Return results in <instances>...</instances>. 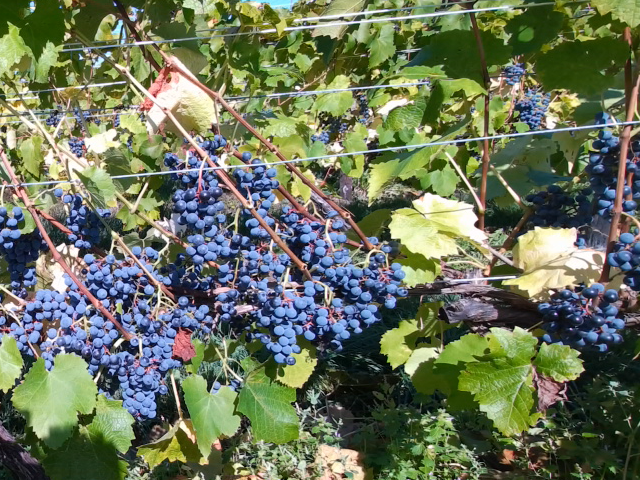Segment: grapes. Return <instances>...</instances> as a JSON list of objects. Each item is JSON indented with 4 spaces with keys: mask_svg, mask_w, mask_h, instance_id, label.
<instances>
[{
    "mask_svg": "<svg viewBox=\"0 0 640 480\" xmlns=\"http://www.w3.org/2000/svg\"><path fill=\"white\" fill-rule=\"evenodd\" d=\"M170 175L173 181L181 179L183 183H195L190 189L183 191L177 189L172 196L175 203V209L180 212L177 217L179 225L195 224L198 230H202V234L195 233L187 237L189 244L195 247H188L186 254L192 257L194 263V272H189L182 261L186 260L185 253H178L177 259L173 263L162 266L160 272L168 273V276L159 275V270L147 263L148 259L157 260L159 253L157 249L152 247L133 246L132 252L139 258V261L147 270V272L160 283L173 287H185L188 290L207 291L211 288V284L218 282L226 285L228 281L234 280V264L232 262H223L218 268L216 275H208L207 278L199 273L204 269L206 262H216L218 257L222 258L238 256L243 248L242 254L247 259L244 265L242 260L238 261L239 276L235 279L237 289H230L228 292L220 293L213 297L214 301L220 302L218 311L220 320L228 323L233 319V315L237 314L234 307L237 299L242 297V292L248 289H258L259 293H255L251 297V304L257 310L249 312V320L256 322L259 328L268 327L270 334L277 337V342L271 341L269 334H263L259 329H254L252 333L245 335V341L252 343L254 339H260V343L265 345V349L273 355L275 363H285L286 365H294L296 358L291 354H299L301 347L297 344V336L303 335L305 340L314 342L317 335H325L329 330L333 333L332 339L329 341L330 348L336 353H342L344 346L341 340L350 338V330L355 334H362L365 328H369L374 323L382 320V315L378 312L379 308L371 304L376 298L378 304H384L386 309H394L397 306V298L407 297L408 290L399 287L401 280L406 277L403 265L400 262L390 265L391 271L384 270L382 275L389 278V284L380 281L381 275L379 264L386 263V256L382 253L395 254L399 248L397 241L391 240L388 245H382L380 251L376 255L370 257L368 267L356 268L354 262L350 260L349 249L341 247L333 252V256H327L330 249V243L318 238V233L324 230V226L319 222H308L304 220L299 222L303 215L301 213H289L290 208L285 206L281 209L280 220L291 230H281L279 233L284 234L281 239H285L293 244L309 243L302 247L301 259L304 262H310L315 266V272L311 277L315 281H321L327 284L330 290H335L341 286V293L344 295L348 303L347 305L341 298H333L330 305L335 311L343 312L338 322L329 319V311L321 309V306L314 299L317 292H322L324 287L312 281H304L302 283L303 295H298L292 291H285L283 299L278 297L282 291V284L274 286V293H269V280L262 279L257 281L251 279L253 273L267 275L271 273L275 282L280 283L285 266H290L292 259L284 252L277 255L276 260L272 253L262 250L258 253L257 246L252 243L248 236L227 229L220 234V229L215 224L217 211H223L225 204L222 201H216L223 195V189L219 186L217 174L214 171Z\"/></svg>",
    "mask_w": 640,
    "mask_h": 480,
    "instance_id": "01657485",
    "label": "grapes"
},
{
    "mask_svg": "<svg viewBox=\"0 0 640 480\" xmlns=\"http://www.w3.org/2000/svg\"><path fill=\"white\" fill-rule=\"evenodd\" d=\"M64 284L67 286L64 293L51 289H39L36 292L35 302L27 303L23 310V317L19 326L16 322L10 324L9 334L17 341V347L22 354L29 357L34 351L27 343L37 344L43 333L42 320L49 322L60 319V327L63 335L52 342L53 346L63 347L65 352L80 350L83 359L88 362V373L95 375L101 365L109 369V378L118 377L122 392L123 407L132 415L139 412L154 418L157 415L156 392L161 395L169 393V387L160 383L168 370L181 368L183 361L173 358L172 346L174 338L180 331V327L189 328L191 331L204 333L211 331L213 318L206 304L200 306L189 304L190 299L181 296L177 300V309H172L159 314L157 320L151 321V306L146 298H140L130 313L114 314V318L128 332L135 334L142 332L143 355L140 364L136 366L135 356L130 350L117 352L114 355L105 354L103 346H110L113 340L118 338L116 327L108 320L99 309L88 308L92 305L86 295L78 293V287L70 276L63 274ZM85 315L90 317L89 330L92 344H86L87 331L78 324L71 329L73 319L78 321Z\"/></svg>",
    "mask_w": 640,
    "mask_h": 480,
    "instance_id": "b958b902",
    "label": "grapes"
},
{
    "mask_svg": "<svg viewBox=\"0 0 640 480\" xmlns=\"http://www.w3.org/2000/svg\"><path fill=\"white\" fill-rule=\"evenodd\" d=\"M604 293V302L598 304L596 311L589 313L581 305L587 298H597ZM619 300L616 289H607L601 283H593L584 287L582 295L569 289H562L560 294L550 303H539L537 309L544 315L542 318V340L548 344L573 343L577 347L592 344L596 353H606L609 344L621 345L624 336L618 331L625 329V321L618 316L615 303Z\"/></svg>",
    "mask_w": 640,
    "mask_h": 480,
    "instance_id": "0513c4c2",
    "label": "grapes"
},
{
    "mask_svg": "<svg viewBox=\"0 0 640 480\" xmlns=\"http://www.w3.org/2000/svg\"><path fill=\"white\" fill-rule=\"evenodd\" d=\"M6 214L7 209L0 207V224L4 223L9 228L0 231V248L6 254L5 259L9 264L7 270L11 274L12 294L25 299L28 296L27 287L35 286L38 283L36 268L34 266L28 267L25 263L37 261L39 259L37 251L47 252L49 245L37 228L27 234L18 230V221L25 219L22 207L12 209L13 217L5 219Z\"/></svg>",
    "mask_w": 640,
    "mask_h": 480,
    "instance_id": "84f90ec7",
    "label": "grapes"
},
{
    "mask_svg": "<svg viewBox=\"0 0 640 480\" xmlns=\"http://www.w3.org/2000/svg\"><path fill=\"white\" fill-rule=\"evenodd\" d=\"M124 259L116 260L115 255H107L105 257L106 264L102 266L98 263V259L94 257L92 253H87L84 256V262L89 266L87 269H82L81 273L86 275V279L82 281V284L90 292L95 294V297L102 303L107 311L112 309V298L115 304H124L125 300L129 298L131 293H135L137 288L132 281V277H140V283L143 285L142 292L145 295H153L155 293V287L150 283V278L143 274L139 265L134 263L132 266L124 265L123 267H117L114 272H111V265L115 262L123 263Z\"/></svg>",
    "mask_w": 640,
    "mask_h": 480,
    "instance_id": "f8a65327",
    "label": "grapes"
},
{
    "mask_svg": "<svg viewBox=\"0 0 640 480\" xmlns=\"http://www.w3.org/2000/svg\"><path fill=\"white\" fill-rule=\"evenodd\" d=\"M592 148L598 152L589 154V164L585 166L588 174L594 175L590 179V186L595 194L596 211L600 218L608 219L610 211L615 205V189L609 185L617 182L616 174L607 166L615 163L614 154L620 151L619 137L611 130H601L598 138L592 141Z\"/></svg>",
    "mask_w": 640,
    "mask_h": 480,
    "instance_id": "5460f4e3",
    "label": "grapes"
},
{
    "mask_svg": "<svg viewBox=\"0 0 640 480\" xmlns=\"http://www.w3.org/2000/svg\"><path fill=\"white\" fill-rule=\"evenodd\" d=\"M265 167L253 168L254 173L235 169L233 177L238 182L236 188L245 199L251 197L254 201H258L262 197L266 198L259 204L257 211L267 225L273 226L275 219L268 216V211L272 208V202L276 199V195L271 192V189L279 187V181L272 179L278 175V172L275 168L266 169Z\"/></svg>",
    "mask_w": 640,
    "mask_h": 480,
    "instance_id": "83cd7487",
    "label": "grapes"
},
{
    "mask_svg": "<svg viewBox=\"0 0 640 480\" xmlns=\"http://www.w3.org/2000/svg\"><path fill=\"white\" fill-rule=\"evenodd\" d=\"M65 204H71L70 216L65 218V224L71 230L68 240L73 242L75 249H93L95 244L101 242L98 232V216L89 211L83 202L81 194L66 193L63 196Z\"/></svg>",
    "mask_w": 640,
    "mask_h": 480,
    "instance_id": "e5b3c951",
    "label": "grapes"
},
{
    "mask_svg": "<svg viewBox=\"0 0 640 480\" xmlns=\"http://www.w3.org/2000/svg\"><path fill=\"white\" fill-rule=\"evenodd\" d=\"M634 234H639V228H634ZM633 233L624 232L619 236V240L614 244V252H609L606 262L610 267L619 268L625 271L623 283L634 292L640 291V241L635 242Z\"/></svg>",
    "mask_w": 640,
    "mask_h": 480,
    "instance_id": "2adb6a1f",
    "label": "grapes"
},
{
    "mask_svg": "<svg viewBox=\"0 0 640 480\" xmlns=\"http://www.w3.org/2000/svg\"><path fill=\"white\" fill-rule=\"evenodd\" d=\"M632 150L627 154V172L634 173V183L630 186L625 183L623 188V210L635 215V211L638 208V202L640 199V159L634 162V157L640 158V140H634L631 143Z\"/></svg>",
    "mask_w": 640,
    "mask_h": 480,
    "instance_id": "ef6de9ee",
    "label": "grapes"
},
{
    "mask_svg": "<svg viewBox=\"0 0 640 480\" xmlns=\"http://www.w3.org/2000/svg\"><path fill=\"white\" fill-rule=\"evenodd\" d=\"M196 142L216 163L219 161V156L216 154L215 149L225 147L227 145V139L221 133H216L214 135V140L202 141L201 137H197Z\"/></svg>",
    "mask_w": 640,
    "mask_h": 480,
    "instance_id": "1ff8f66d",
    "label": "grapes"
},
{
    "mask_svg": "<svg viewBox=\"0 0 640 480\" xmlns=\"http://www.w3.org/2000/svg\"><path fill=\"white\" fill-rule=\"evenodd\" d=\"M244 227L250 229V235L252 237L264 239L266 242L271 240V235L263 227H260V223L256 218L246 219L244 221Z\"/></svg>",
    "mask_w": 640,
    "mask_h": 480,
    "instance_id": "54f908b8",
    "label": "grapes"
},
{
    "mask_svg": "<svg viewBox=\"0 0 640 480\" xmlns=\"http://www.w3.org/2000/svg\"><path fill=\"white\" fill-rule=\"evenodd\" d=\"M61 349L60 348H51L49 349L47 352H43L41 354V357L43 358V361L45 362V366L48 372H52L54 369V364L56 361V356L57 353H60Z\"/></svg>",
    "mask_w": 640,
    "mask_h": 480,
    "instance_id": "91a60905",
    "label": "grapes"
},
{
    "mask_svg": "<svg viewBox=\"0 0 640 480\" xmlns=\"http://www.w3.org/2000/svg\"><path fill=\"white\" fill-rule=\"evenodd\" d=\"M163 164L165 166H169V170L184 168L185 163L182 162V159L173 153H165Z\"/></svg>",
    "mask_w": 640,
    "mask_h": 480,
    "instance_id": "dcf779d0",
    "label": "grapes"
},
{
    "mask_svg": "<svg viewBox=\"0 0 640 480\" xmlns=\"http://www.w3.org/2000/svg\"><path fill=\"white\" fill-rule=\"evenodd\" d=\"M186 161L188 162V166L190 168L199 167L202 164V160L197 158V153L194 151H189L186 157Z\"/></svg>",
    "mask_w": 640,
    "mask_h": 480,
    "instance_id": "802abce8",
    "label": "grapes"
},
{
    "mask_svg": "<svg viewBox=\"0 0 640 480\" xmlns=\"http://www.w3.org/2000/svg\"><path fill=\"white\" fill-rule=\"evenodd\" d=\"M242 158H243L244 161H248L249 162L251 160V158H252V153L250 151H244L242 153ZM258 161H261V160L259 158H254V159L251 160V163H255V162H258Z\"/></svg>",
    "mask_w": 640,
    "mask_h": 480,
    "instance_id": "012428b0",
    "label": "grapes"
},
{
    "mask_svg": "<svg viewBox=\"0 0 640 480\" xmlns=\"http://www.w3.org/2000/svg\"><path fill=\"white\" fill-rule=\"evenodd\" d=\"M97 392H98L99 394H103V395H105V397H106L107 399H112V400H114V398L111 396V394H110L109 392H107V391H105V392H104V389H103L102 387H99V388L97 389Z\"/></svg>",
    "mask_w": 640,
    "mask_h": 480,
    "instance_id": "9fbda902",
    "label": "grapes"
}]
</instances>
